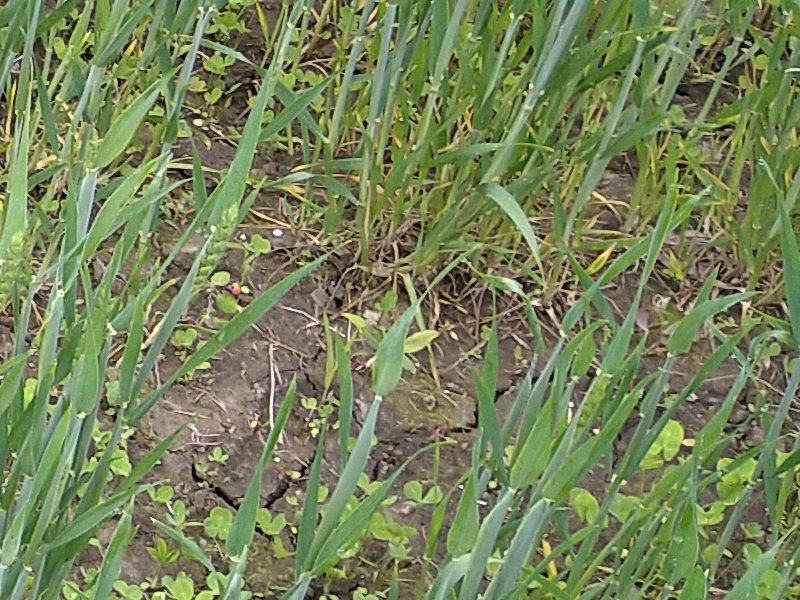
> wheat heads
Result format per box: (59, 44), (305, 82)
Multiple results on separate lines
(575, 370), (606, 444)
(0, 227), (25, 317)
(190, 203), (238, 296)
